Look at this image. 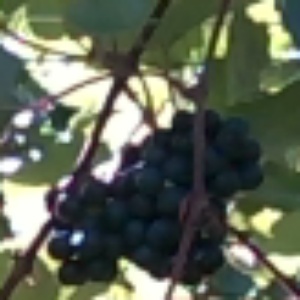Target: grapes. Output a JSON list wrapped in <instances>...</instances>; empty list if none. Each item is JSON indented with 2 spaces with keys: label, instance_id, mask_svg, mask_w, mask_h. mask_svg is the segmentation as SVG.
Instances as JSON below:
<instances>
[{
  "label": "grapes",
  "instance_id": "obj_3",
  "mask_svg": "<svg viewBox=\"0 0 300 300\" xmlns=\"http://www.w3.org/2000/svg\"><path fill=\"white\" fill-rule=\"evenodd\" d=\"M193 264L183 269L182 278L189 285L198 284L203 274L214 273L225 261L223 248L213 239L201 240L193 250Z\"/></svg>",
  "mask_w": 300,
  "mask_h": 300
},
{
  "label": "grapes",
  "instance_id": "obj_2",
  "mask_svg": "<svg viewBox=\"0 0 300 300\" xmlns=\"http://www.w3.org/2000/svg\"><path fill=\"white\" fill-rule=\"evenodd\" d=\"M248 121L242 116L227 122L220 116L206 123V177L210 192L232 196L240 188L253 191L263 182V171L255 163L260 145L246 133Z\"/></svg>",
  "mask_w": 300,
  "mask_h": 300
},
{
  "label": "grapes",
  "instance_id": "obj_1",
  "mask_svg": "<svg viewBox=\"0 0 300 300\" xmlns=\"http://www.w3.org/2000/svg\"><path fill=\"white\" fill-rule=\"evenodd\" d=\"M172 125L138 144L125 142L108 184L77 174L55 181L47 197L55 221L47 249L65 260L64 283L80 285L87 275L111 282L123 255L154 277L173 268L184 225L177 204L194 184V118L179 111Z\"/></svg>",
  "mask_w": 300,
  "mask_h": 300
}]
</instances>
